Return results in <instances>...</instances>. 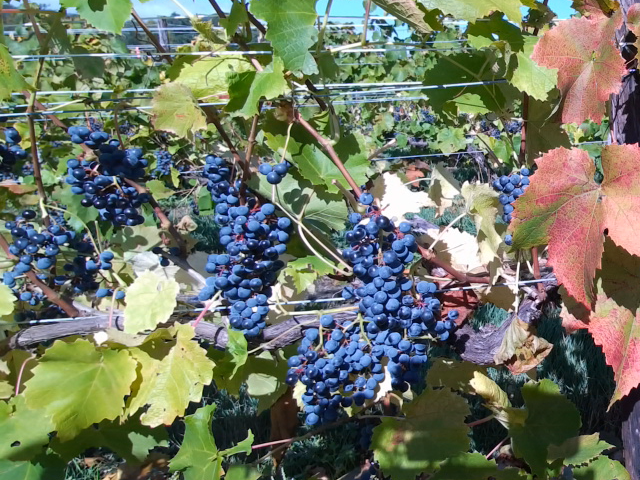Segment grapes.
Returning a JSON list of instances; mask_svg holds the SVG:
<instances>
[{
    "label": "grapes",
    "mask_w": 640,
    "mask_h": 480,
    "mask_svg": "<svg viewBox=\"0 0 640 480\" xmlns=\"http://www.w3.org/2000/svg\"><path fill=\"white\" fill-rule=\"evenodd\" d=\"M205 161L202 174L210 180L207 188L212 194L211 200L217 203L214 211L218 214L214 220L224 225L218 230L219 243L229 254L205 258L207 272L215 271L218 265L226 267L221 275L205 280L206 287L199 292L198 299L206 301L222 288L223 295L232 303L230 327L255 338L265 326L264 318L270 311L267 299L272 295L270 286L276 281L275 272L284 267V262L276 258L287 249L289 233L285 230L292 225V220L278 217L275 228L262 223L266 215L276 211L273 203L262 204L255 214L246 206L230 207L238 203L235 193L240 191L243 181L237 179L234 186L226 181L224 176L230 174V169L224 158L209 154Z\"/></svg>",
    "instance_id": "obj_2"
},
{
    "label": "grapes",
    "mask_w": 640,
    "mask_h": 480,
    "mask_svg": "<svg viewBox=\"0 0 640 480\" xmlns=\"http://www.w3.org/2000/svg\"><path fill=\"white\" fill-rule=\"evenodd\" d=\"M36 216V212L33 209H27L21 214H18L13 220L7 221L5 227L11 230V234L17 237L13 241L8 250L12 255H19L22 250L26 251L27 255H21L19 261L15 264L12 271H7L3 274V284L7 286L9 290L16 287L15 278L25 275L27 271L31 269L32 261H36V267L41 270H47L57 259V254L60 252L59 246H62L68 240H75L77 234L71 230H65L61 234V227L58 224H49L46 232L40 234L35 230V226L32 223L27 225L17 226L23 219L31 220ZM45 244L44 253L49 257L37 253L38 246Z\"/></svg>",
    "instance_id": "obj_4"
},
{
    "label": "grapes",
    "mask_w": 640,
    "mask_h": 480,
    "mask_svg": "<svg viewBox=\"0 0 640 480\" xmlns=\"http://www.w3.org/2000/svg\"><path fill=\"white\" fill-rule=\"evenodd\" d=\"M358 201L362 205L372 206L375 211H379L380 210V208L377 205H373L372 204L374 202V197H373V194L371 192H363L362 194H360L358 196Z\"/></svg>",
    "instance_id": "obj_9"
},
{
    "label": "grapes",
    "mask_w": 640,
    "mask_h": 480,
    "mask_svg": "<svg viewBox=\"0 0 640 480\" xmlns=\"http://www.w3.org/2000/svg\"><path fill=\"white\" fill-rule=\"evenodd\" d=\"M290 167L291 164L288 161L279 162L274 166L270 163L262 162L258 166V173L262 176H267L269 184L276 185L281 182Z\"/></svg>",
    "instance_id": "obj_7"
},
{
    "label": "grapes",
    "mask_w": 640,
    "mask_h": 480,
    "mask_svg": "<svg viewBox=\"0 0 640 480\" xmlns=\"http://www.w3.org/2000/svg\"><path fill=\"white\" fill-rule=\"evenodd\" d=\"M3 132L4 139L10 146L0 143V155L3 156L2 160L6 164L14 165L17 157L25 158L27 156V151L17 145L22 140V135L16 128L10 126H6Z\"/></svg>",
    "instance_id": "obj_6"
},
{
    "label": "grapes",
    "mask_w": 640,
    "mask_h": 480,
    "mask_svg": "<svg viewBox=\"0 0 640 480\" xmlns=\"http://www.w3.org/2000/svg\"><path fill=\"white\" fill-rule=\"evenodd\" d=\"M113 259V253L111 251H103L98 255V261L93 260L86 261L84 263V269L86 271H95L98 269L109 270L112 267L110 261Z\"/></svg>",
    "instance_id": "obj_8"
},
{
    "label": "grapes",
    "mask_w": 640,
    "mask_h": 480,
    "mask_svg": "<svg viewBox=\"0 0 640 480\" xmlns=\"http://www.w3.org/2000/svg\"><path fill=\"white\" fill-rule=\"evenodd\" d=\"M530 170L528 168H522L520 175L503 174L498 180L492 182V186L503 191L504 194L498 197L500 205L505 212L502 216V220L505 223L512 221V211L514 210L513 203L517 200L518 196L524 193L525 187L529 185Z\"/></svg>",
    "instance_id": "obj_5"
},
{
    "label": "grapes",
    "mask_w": 640,
    "mask_h": 480,
    "mask_svg": "<svg viewBox=\"0 0 640 480\" xmlns=\"http://www.w3.org/2000/svg\"><path fill=\"white\" fill-rule=\"evenodd\" d=\"M348 217L353 229L347 230L344 238L351 244L349 248L342 250V258L353 264V273L357 277L367 274L374 279L357 289L351 285H343L340 296L345 299L353 296L360 299L359 310L353 313L365 315L366 335L370 342H359V326H349L346 333L335 329L329 340L323 342L324 351L333 357L318 359V352L308 349L319 336L318 329L308 328L304 331L302 345L297 348L298 355L291 356L287 361L289 369L285 383L294 385L300 380L307 386V391L301 394V400L305 406L304 411L308 414L304 422L310 426L320 423L327 407L336 410L339 403L343 407H350L353 401L357 407H361L366 399H372L377 383L385 379L383 364L380 362L383 356L389 358L387 370L394 390L403 386V365L409 366L411 371H419L421 365L428 361L424 343L415 344L403 339L398 331L391 332L397 324L406 329L410 338H416L421 331H427L445 342L449 338V332L456 327L454 320L460 317L457 310L451 309L447 313L448 319L434 320V312L440 310V301L435 295L438 285L434 282L423 280L416 285L415 291L422 295L421 306L416 305L412 295L402 294L413 288V281L401 279L394 274H400L405 268L404 264L415 257L418 243L413 235L406 234L399 239L396 233H390L388 241L392 249L386 250L382 256L385 265H374L380 244L358 240H363L365 236L375 239L379 229L393 231L395 220L385 215H371L369 222L358 225L363 219L359 212H350ZM364 367H369L372 373L368 380L365 377L348 380L353 369L361 371ZM339 385H343L345 393L353 391L355 387L366 388L353 392L351 396L337 394L332 399L318 395L326 388L329 392H336Z\"/></svg>",
    "instance_id": "obj_1"
},
{
    "label": "grapes",
    "mask_w": 640,
    "mask_h": 480,
    "mask_svg": "<svg viewBox=\"0 0 640 480\" xmlns=\"http://www.w3.org/2000/svg\"><path fill=\"white\" fill-rule=\"evenodd\" d=\"M71 140L77 144L82 142L92 149H98L99 162L102 164L98 170V176L89 177L87 169L93 170L98 162L96 160L82 161L70 158L67 161L69 176L65 179L67 185H72L71 192L74 195H86V198L80 200L83 207H93L99 209L100 219L107 221L108 219L115 226L121 222H125L128 226L143 225L145 218L138 215V209L141 203H148L150 195L148 193H139L134 186L123 185L118 190L115 185H111L106 190H101L106 185L113 182V175L128 177L131 180H138L145 176V168L149 165L146 159L140 157L144 153L142 147H130L118 149L120 140L118 138L111 139L109 142V134L105 131H92L86 126H69L67 128Z\"/></svg>",
    "instance_id": "obj_3"
}]
</instances>
